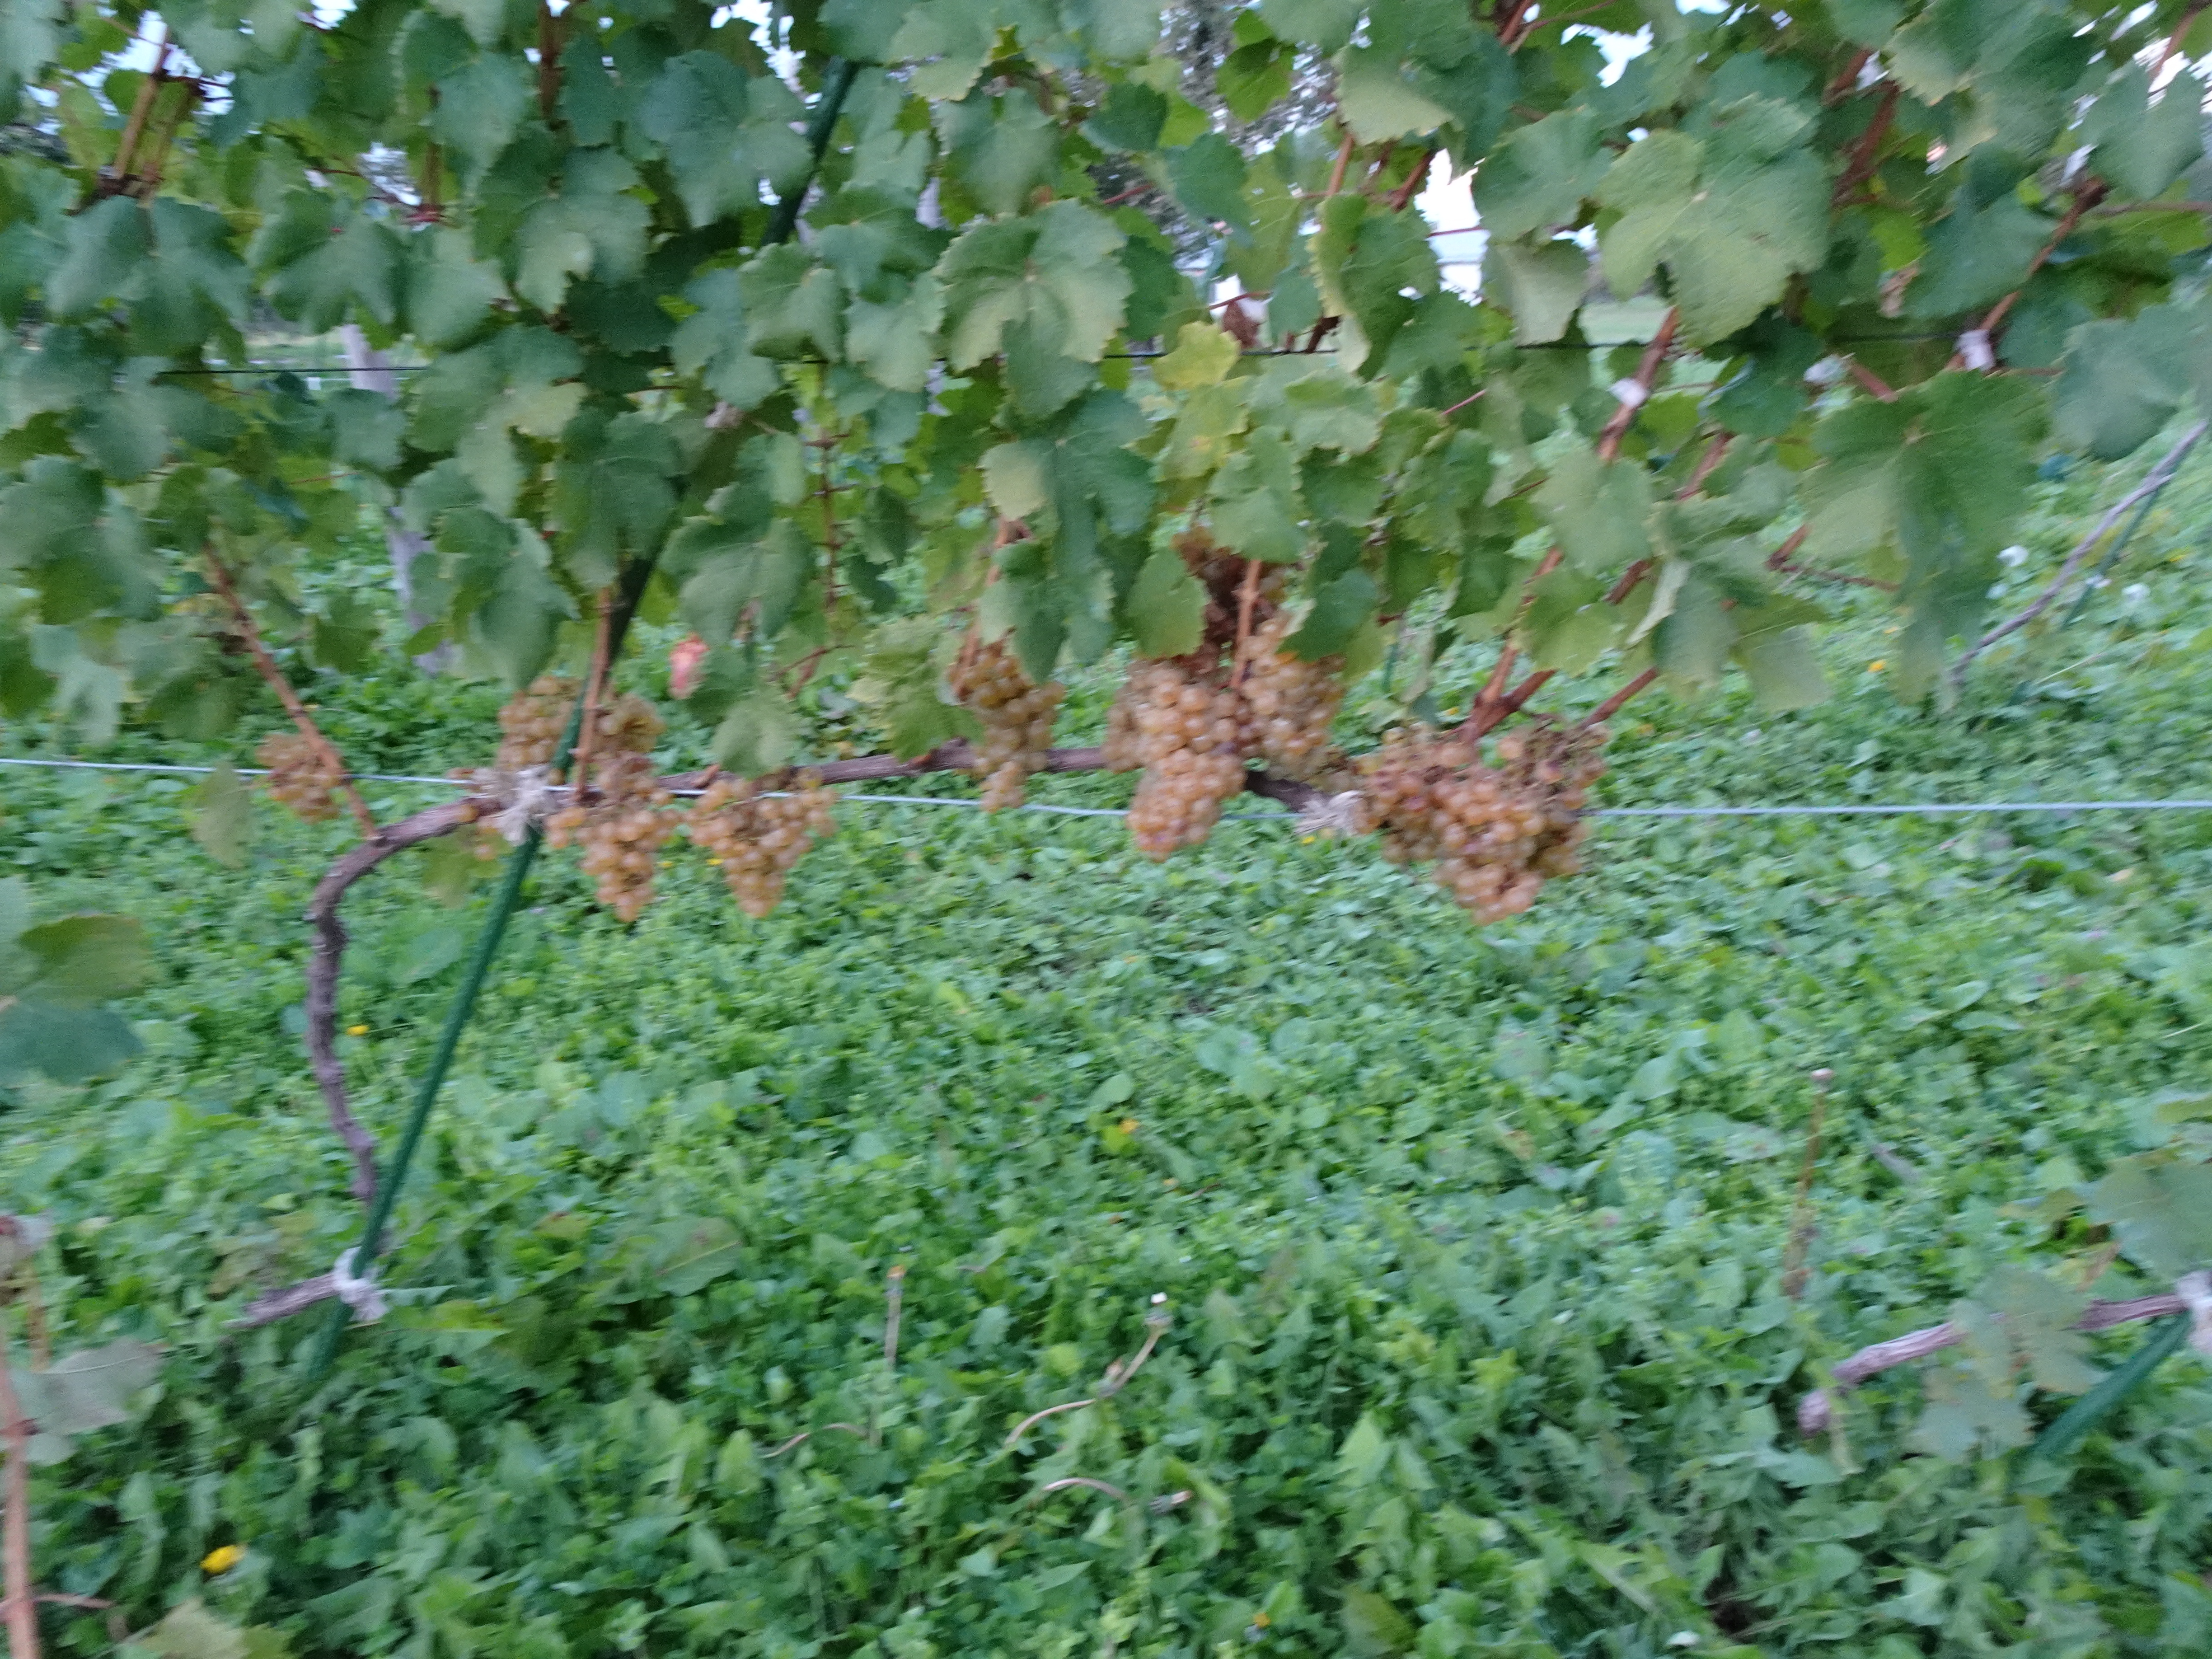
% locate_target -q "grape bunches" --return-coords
[942,649,1065,815]
[542,772,684,926]
[1495,720,1612,879]
[494,671,577,773]
[1427,764,1548,928]
[446,767,515,862]
[1330,720,1477,867]
[1165,522,1302,671]
[1129,662,1245,862]
[253,729,347,828]
[1100,675,1143,774]
[686,763,838,921]
[1232,617,1349,779]
[596,684,669,764]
